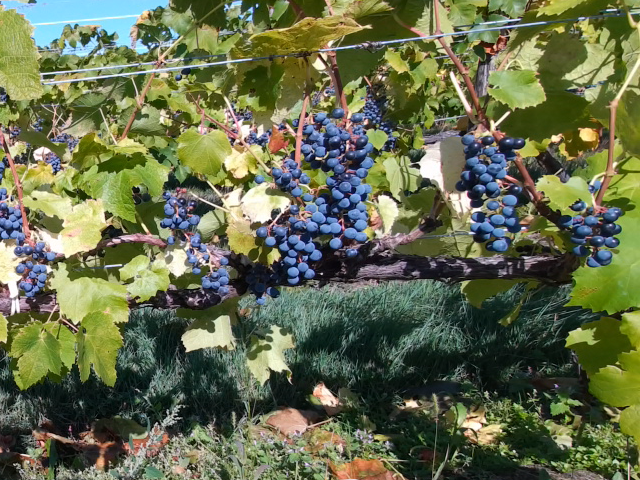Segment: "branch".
Here are the masks:
<instances>
[{"instance_id": "obj_1", "label": "branch", "mask_w": 640, "mask_h": 480, "mask_svg": "<svg viewBox=\"0 0 640 480\" xmlns=\"http://www.w3.org/2000/svg\"><path fill=\"white\" fill-rule=\"evenodd\" d=\"M640 64V55L637 56L635 62L633 63V65L630 67V69L628 70L622 84L620 85V88L618 89L616 95L614 96L613 100H611L608 104V117H609V134H608V149H607V153H606V166H607V173H606V177L603 181V184L601 185V188L599 189V191L596 194L595 197V203L597 205H600L602 203V199L604 194L606 193V191L608 190L610 183L612 182L613 176H614V151H615V136H616V104L619 101V98L622 96L627 84L629 83V80L632 77V74L634 73V71L638 68Z\"/></svg>"}, {"instance_id": "obj_2", "label": "branch", "mask_w": 640, "mask_h": 480, "mask_svg": "<svg viewBox=\"0 0 640 480\" xmlns=\"http://www.w3.org/2000/svg\"><path fill=\"white\" fill-rule=\"evenodd\" d=\"M516 167L520 172L521 177L530 188L531 192L536 196V200L532 202V206L541 216H543L549 222H552L553 224L558 223L560 221V218L562 217L561 212L559 210L552 209L543 201V192L537 188L536 184L532 181L526 168L524 167V164L520 160L516 161Z\"/></svg>"}, {"instance_id": "obj_3", "label": "branch", "mask_w": 640, "mask_h": 480, "mask_svg": "<svg viewBox=\"0 0 640 480\" xmlns=\"http://www.w3.org/2000/svg\"><path fill=\"white\" fill-rule=\"evenodd\" d=\"M0 145L3 148V151H4L5 156L7 158L8 166L10 168L12 177L14 179L15 187L18 190V198H19L18 199V205H19V208L21 210V217H22V221L24 223V233H25L24 239L26 240V242L29 245H32L33 244V240L30 237L29 221H28L27 215H26V207L24 206L23 199H22L23 198V188H22V186L20 184L19 177L17 175L16 168H15L13 160H12V155H11L10 150H9L5 140H4V134H3V130L2 129H0Z\"/></svg>"}, {"instance_id": "obj_4", "label": "branch", "mask_w": 640, "mask_h": 480, "mask_svg": "<svg viewBox=\"0 0 640 480\" xmlns=\"http://www.w3.org/2000/svg\"><path fill=\"white\" fill-rule=\"evenodd\" d=\"M188 98L191 100L192 104L194 105V107L204 116L206 117L208 120H210L212 123H214L218 128H220L223 132L229 134L233 139H235L236 141L239 142L240 145H242V147L244 149H246L248 151V153L250 154V156L253 158L254 161H256L257 163H259V165L265 170V172L267 174L271 173V169L268 167V165L261 159L259 158L255 152L253 151L252 147L247 144L246 141H244L238 134H235L231 129L227 128L225 125H223L220 121H218L215 117H213L211 114H209L207 111H205L200 105L199 102L196 100V98L194 97V95L192 93L188 94Z\"/></svg>"}, {"instance_id": "obj_5", "label": "branch", "mask_w": 640, "mask_h": 480, "mask_svg": "<svg viewBox=\"0 0 640 480\" xmlns=\"http://www.w3.org/2000/svg\"><path fill=\"white\" fill-rule=\"evenodd\" d=\"M439 43L441 44L442 48L446 51V53L449 55L450 59L453 61V63L455 64V66L458 68V70L462 73L463 78L466 82L467 88H468V92L470 93V97L473 100V102L475 103L476 106V110L478 112V114L480 115L481 118V122L482 125L484 126V128L486 130H489L491 128V125L487 122L486 120V116L485 113L481 107V103L478 100V98L476 97L475 91L473 90V82L471 81L467 70L461 65V63L459 62V60L455 57L454 53L452 52V50L449 48V46L446 44L444 38H440L438 39Z\"/></svg>"}, {"instance_id": "obj_6", "label": "branch", "mask_w": 640, "mask_h": 480, "mask_svg": "<svg viewBox=\"0 0 640 480\" xmlns=\"http://www.w3.org/2000/svg\"><path fill=\"white\" fill-rule=\"evenodd\" d=\"M235 0H223L221 3L217 4L211 10L207 11L201 19L195 23L194 26L190 27L186 31H184L177 39H175L168 49L158 58L157 64L153 65V68H159V65L165 60V58L171 54L173 49L180 44L189 34L196 31L211 15L222 9L224 6L233 4Z\"/></svg>"}, {"instance_id": "obj_7", "label": "branch", "mask_w": 640, "mask_h": 480, "mask_svg": "<svg viewBox=\"0 0 640 480\" xmlns=\"http://www.w3.org/2000/svg\"><path fill=\"white\" fill-rule=\"evenodd\" d=\"M328 54L330 55V59L332 62V68H333V73L336 79V83H337V89H338V93H339V97L342 103V107H343V112L345 114L344 116V120H345V129L348 133H352L353 132V127L349 122L348 119V105H347V100L346 97L344 95V90L342 87V81H341V77H340V73L338 71V66H337V60L335 57V53L334 52H328Z\"/></svg>"}, {"instance_id": "obj_8", "label": "branch", "mask_w": 640, "mask_h": 480, "mask_svg": "<svg viewBox=\"0 0 640 480\" xmlns=\"http://www.w3.org/2000/svg\"><path fill=\"white\" fill-rule=\"evenodd\" d=\"M309 96H310V92L306 91L305 94H304V98H303V102H302V106H301L300 119H299V123H298L297 134H296L295 161H296L298 169L302 168V162H301V136H302V133H303V125H304V121H305V114H306V109H307Z\"/></svg>"}, {"instance_id": "obj_9", "label": "branch", "mask_w": 640, "mask_h": 480, "mask_svg": "<svg viewBox=\"0 0 640 480\" xmlns=\"http://www.w3.org/2000/svg\"><path fill=\"white\" fill-rule=\"evenodd\" d=\"M156 77V73H151V75L149 76V79L147 81V83L143 86L141 93L139 94V98L137 101L138 105H142L143 104V100H144V96L147 93V90L149 89V87L152 85V83L154 82V79Z\"/></svg>"}, {"instance_id": "obj_10", "label": "branch", "mask_w": 640, "mask_h": 480, "mask_svg": "<svg viewBox=\"0 0 640 480\" xmlns=\"http://www.w3.org/2000/svg\"><path fill=\"white\" fill-rule=\"evenodd\" d=\"M139 113L138 109H135L132 111V114L129 118V120L127 121V123L124 125L123 129L121 130V134H120V139L124 140L125 136H126V132L128 131V129L131 127V125L133 124L137 114Z\"/></svg>"}, {"instance_id": "obj_11", "label": "branch", "mask_w": 640, "mask_h": 480, "mask_svg": "<svg viewBox=\"0 0 640 480\" xmlns=\"http://www.w3.org/2000/svg\"><path fill=\"white\" fill-rule=\"evenodd\" d=\"M288 3L298 13L300 18H304L305 17L304 12L299 8V6L294 2V0H288Z\"/></svg>"}]
</instances>
